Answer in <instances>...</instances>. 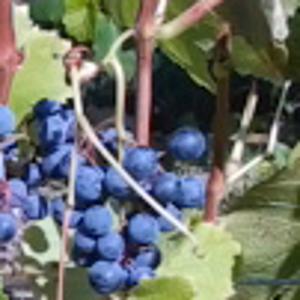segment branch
<instances>
[{
	"label": "branch",
	"instance_id": "obj_3",
	"mask_svg": "<svg viewBox=\"0 0 300 300\" xmlns=\"http://www.w3.org/2000/svg\"><path fill=\"white\" fill-rule=\"evenodd\" d=\"M23 63L24 50L16 43L12 1L0 0V107L9 104Z\"/></svg>",
	"mask_w": 300,
	"mask_h": 300
},
{
	"label": "branch",
	"instance_id": "obj_2",
	"mask_svg": "<svg viewBox=\"0 0 300 300\" xmlns=\"http://www.w3.org/2000/svg\"><path fill=\"white\" fill-rule=\"evenodd\" d=\"M138 36L135 40L137 87L134 89L136 122L134 138L137 145L153 140V107L155 96L154 10L159 0H140Z\"/></svg>",
	"mask_w": 300,
	"mask_h": 300
},
{
	"label": "branch",
	"instance_id": "obj_1",
	"mask_svg": "<svg viewBox=\"0 0 300 300\" xmlns=\"http://www.w3.org/2000/svg\"><path fill=\"white\" fill-rule=\"evenodd\" d=\"M214 44L218 59L213 89L214 112L208 159V180L203 195V210L209 219H214L219 214L218 200L223 185V163L229 116L228 93L233 50L230 47L229 27L226 23L219 22L215 25Z\"/></svg>",
	"mask_w": 300,
	"mask_h": 300
}]
</instances>
